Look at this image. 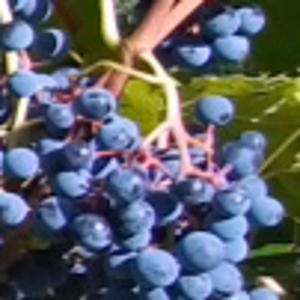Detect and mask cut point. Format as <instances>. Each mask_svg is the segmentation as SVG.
Here are the masks:
<instances>
[{
  "label": "cut point",
  "mask_w": 300,
  "mask_h": 300,
  "mask_svg": "<svg viewBox=\"0 0 300 300\" xmlns=\"http://www.w3.org/2000/svg\"><path fill=\"white\" fill-rule=\"evenodd\" d=\"M142 57L151 64L166 91L165 115L167 118L156 126L148 138L150 143L162 141L167 144L170 139V129L176 136V142L183 146L188 135L180 122L179 84L172 74H168L160 59L150 50H144Z\"/></svg>",
  "instance_id": "cut-point-1"
}]
</instances>
